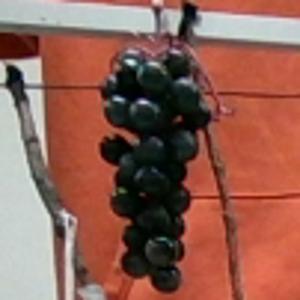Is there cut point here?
Instances as JSON below:
<instances>
[{
	"label": "cut point",
	"instance_id": "6a23745f",
	"mask_svg": "<svg viewBox=\"0 0 300 300\" xmlns=\"http://www.w3.org/2000/svg\"><path fill=\"white\" fill-rule=\"evenodd\" d=\"M150 6L154 17V59L159 60L160 18L166 9V2L164 0H151Z\"/></svg>",
	"mask_w": 300,
	"mask_h": 300
}]
</instances>
